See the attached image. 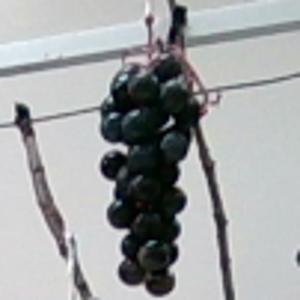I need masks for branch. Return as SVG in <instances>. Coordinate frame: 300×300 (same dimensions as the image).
<instances>
[{"label":"branch","mask_w":300,"mask_h":300,"mask_svg":"<svg viewBox=\"0 0 300 300\" xmlns=\"http://www.w3.org/2000/svg\"><path fill=\"white\" fill-rule=\"evenodd\" d=\"M15 124L21 132L24 156L32 179L34 192L42 215L49 227V232L54 243L59 249V255L65 259L73 284L80 300H100L92 294L74 249L66 234L65 221L58 211L52 193L48 186L45 167L42 165L41 156L36 145L35 130L32 125L30 106L19 101H14Z\"/></svg>","instance_id":"branch-1"},{"label":"branch","mask_w":300,"mask_h":300,"mask_svg":"<svg viewBox=\"0 0 300 300\" xmlns=\"http://www.w3.org/2000/svg\"><path fill=\"white\" fill-rule=\"evenodd\" d=\"M195 137L198 161L200 163L207 191L212 206V218L215 225L216 246L219 255V268L222 277L223 295L225 300H236L235 288L232 282V260L229 256L227 231L230 220L224 210V200L220 194V184L216 175V160L212 159L203 134L201 120L196 126L190 128Z\"/></svg>","instance_id":"branch-2"},{"label":"branch","mask_w":300,"mask_h":300,"mask_svg":"<svg viewBox=\"0 0 300 300\" xmlns=\"http://www.w3.org/2000/svg\"><path fill=\"white\" fill-rule=\"evenodd\" d=\"M171 13V22L165 39V51L176 52L184 57L185 33L188 22L187 5H179L176 0H165Z\"/></svg>","instance_id":"branch-3"}]
</instances>
